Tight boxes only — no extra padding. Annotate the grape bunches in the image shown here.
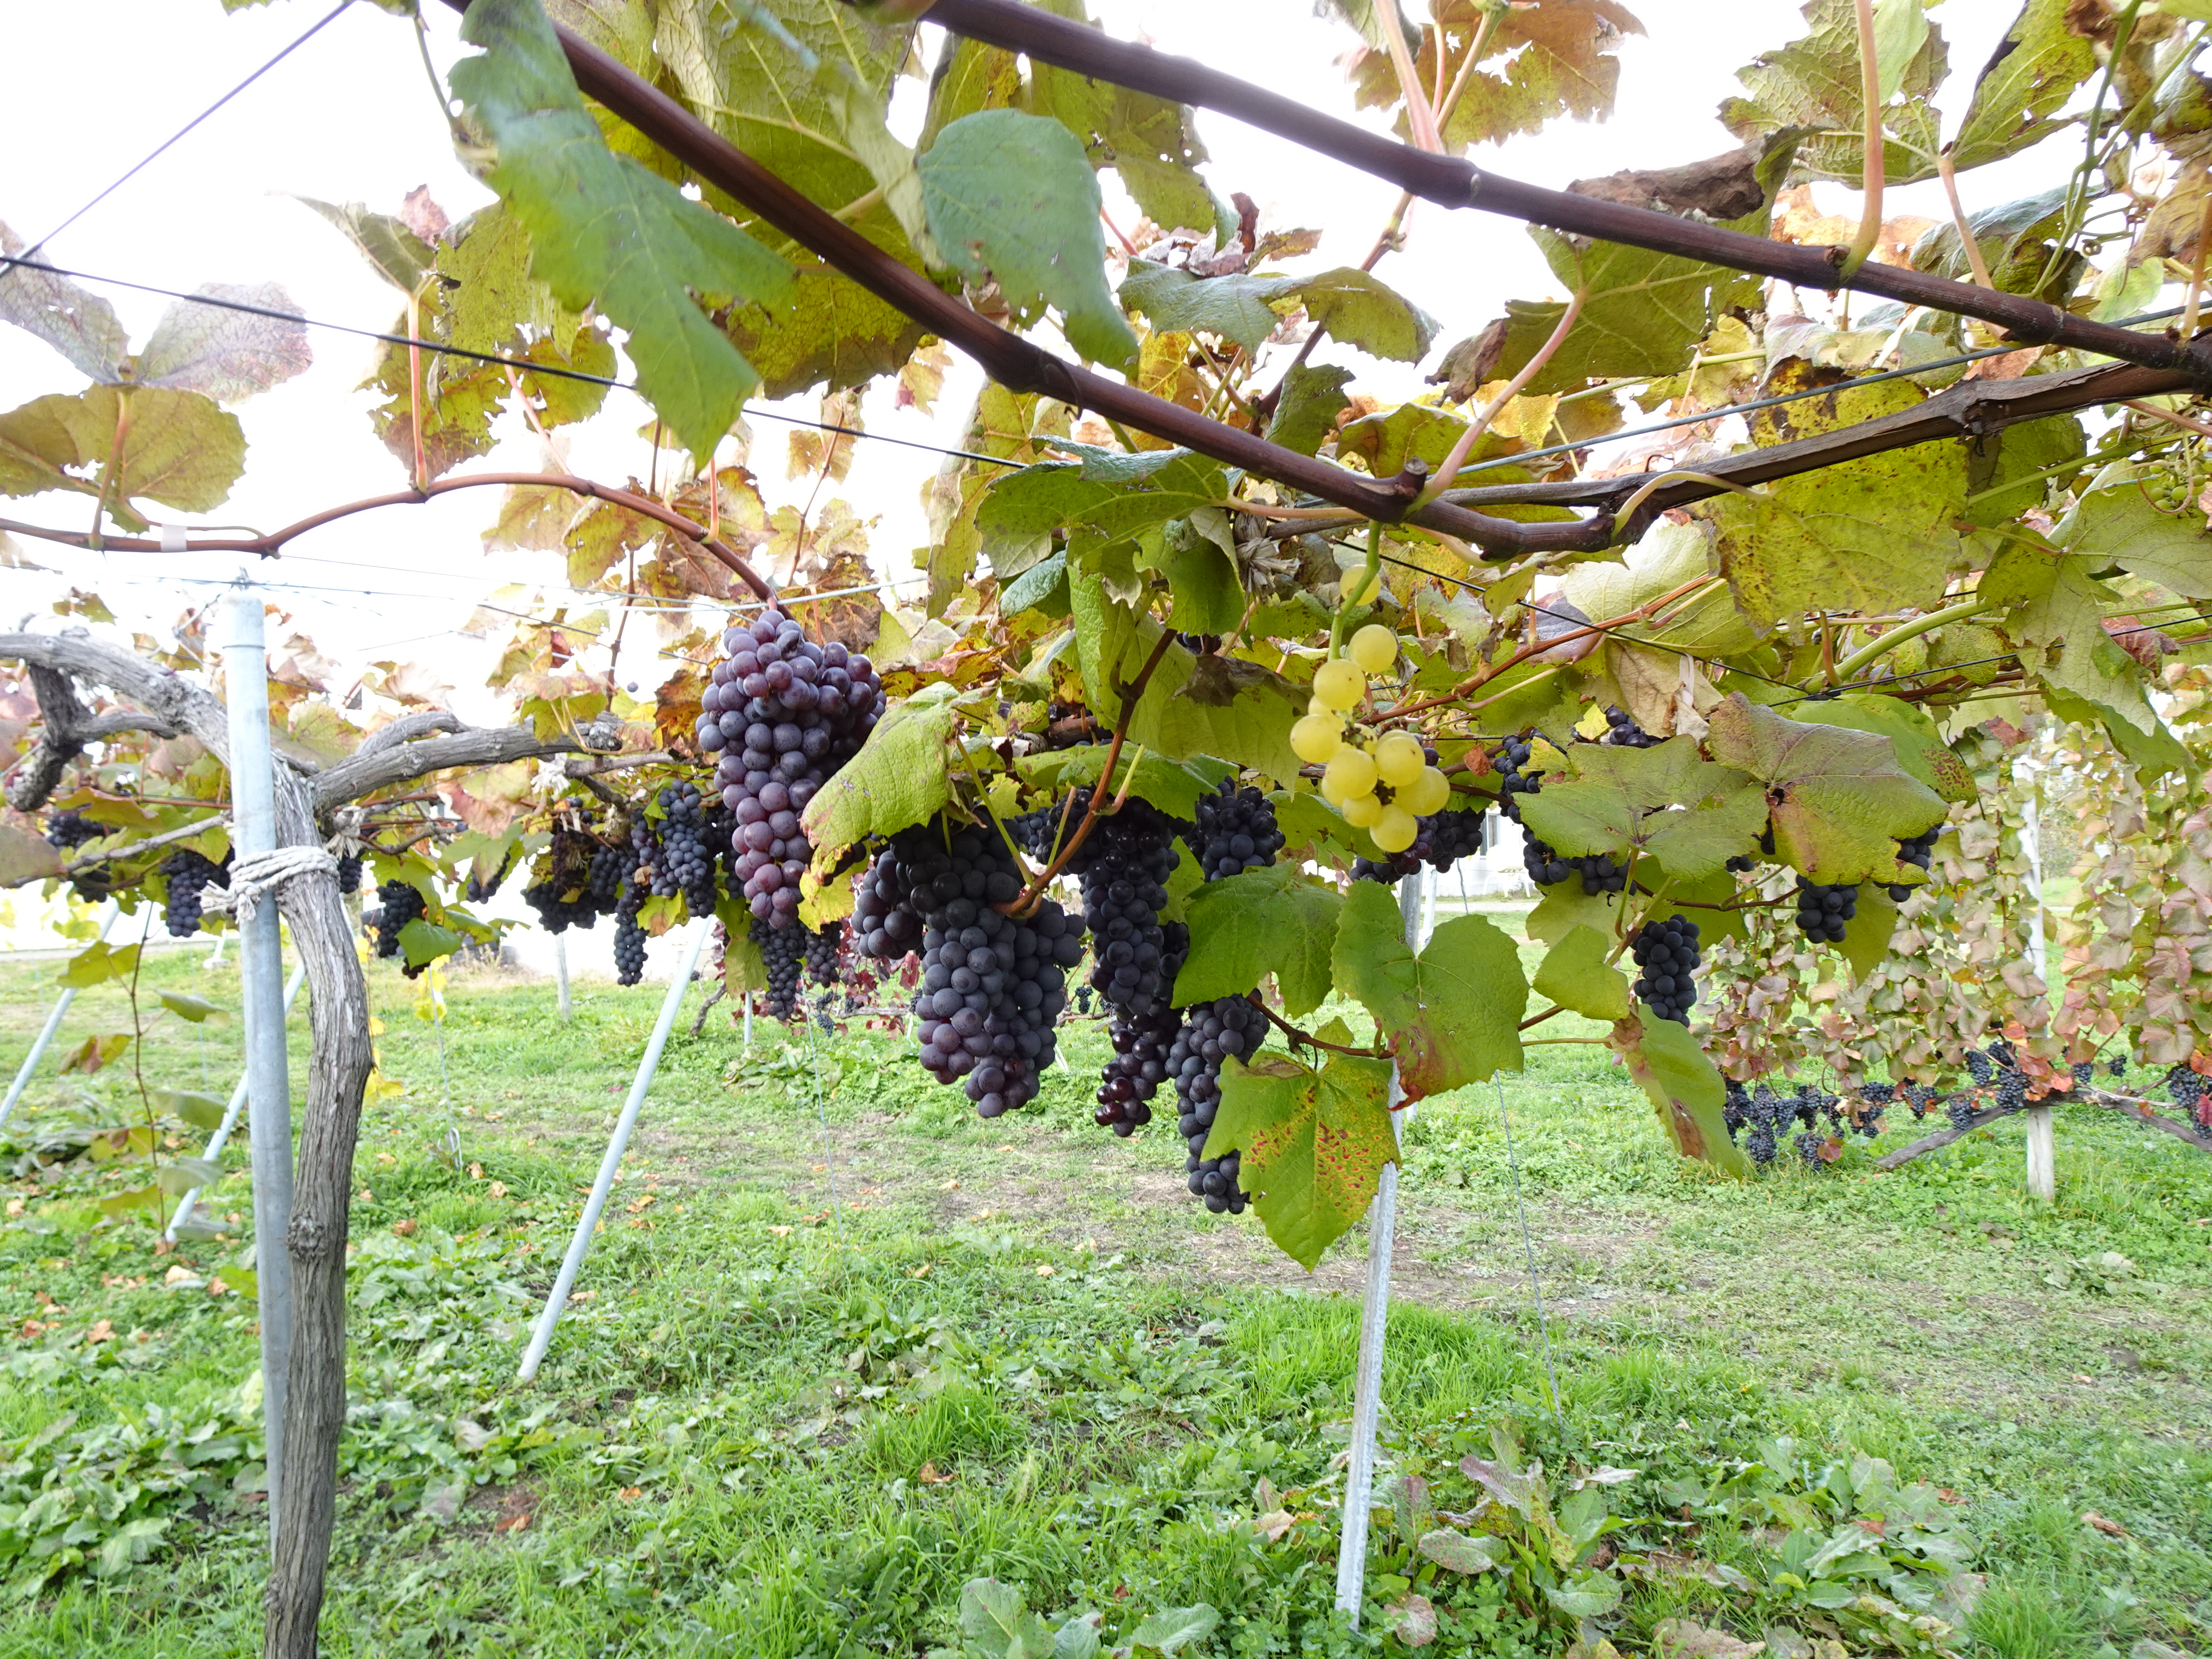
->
[1632,913,1702,1035]
[373,878,442,981]
[752,925,810,1024]
[851,843,923,967]
[1717,843,1772,877]
[904,812,1020,1084]
[682,870,715,929]
[1182,778,1288,887]
[1719,1072,1748,1137]
[1960,1045,1997,1092]
[614,849,652,989]
[1902,1079,1942,1121]
[1093,1002,1177,1151]
[44,802,117,905]
[1007,792,1085,863]
[1747,1086,1780,1171]
[1416,802,1493,873]
[2103,1039,2146,1087]
[1488,729,1547,817]
[1521,838,1574,887]
[2144,447,2210,519]
[627,807,677,907]
[1578,847,1644,900]
[1289,558,1451,854]
[2063,1040,2091,1094]
[1949,1088,1989,1143]
[1166,991,1275,1223]
[563,788,603,829]
[1773,1111,1810,1142]
[1796,1138,1831,1180]
[1792,1083,1843,1135]
[464,840,515,905]
[155,841,206,943]
[813,1011,842,1040]
[965,902,1082,1125]
[580,837,622,903]
[698,606,886,934]
[1852,1085,1890,1142]
[2167,1060,2212,1149]
[317,814,367,900]
[1788,868,1871,949]
[1346,815,1442,885]
[655,775,709,881]
[1596,699,1679,755]
[523,876,597,936]
[1994,1064,2041,1116]
[1042,701,1137,750]
[1169,622,1236,659]
[810,923,846,990]
[1072,792,1183,1015]
[1889,817,1951,908]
